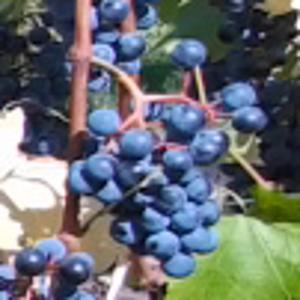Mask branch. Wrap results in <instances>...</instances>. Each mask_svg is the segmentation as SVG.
Returning a JSON list of instances; mask_svg holds the SVG:
<instances>
[{
  "instance_id": "branch-1",
  "label": "branch",
  "mask_w": 300,
  "mask_h": 300,
  "mask_svg": "<svg viewBox=\"0 0 300 300\" xmlns=\"http://www.w3.org/2000/svg\"><path fill=\"white\" fill-rule=\"evenodd\" d=\"M90 0H75V55L71 61V101L69 107V143L66 156L78 161L83 156L84 111L86 106V66L92 55L89 45Z\"/></svg>"
},
{
  "instance_id": "branch-2",
  "label": "branch",
  "mask_w": 300,
  "mask_h": 300,
  "mask_svg": "<svg viewBox=\"0 0 300 300\" xmlns=\"http://www.w3.org/2000/svg\"><path fill=\"white\" fill-rule=\"evenodd\" d=\"M81 203V196L74 190L64 195L62 208V239L67 244H73L78 239L77 213Z\"/></svg>"
}]
</instances>
